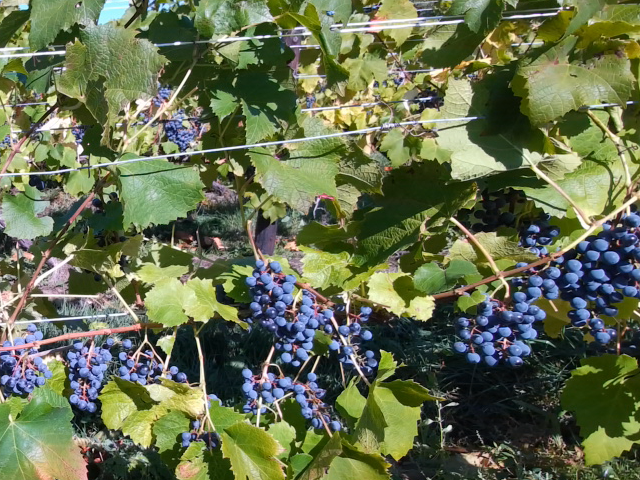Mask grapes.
Returning a JSON list of instances; mask_svg holds the SVG:
<instances>
[{"instance_id": "12", "label": "grapes", "mask_w": 640, "mask_h": 480, "mask_svg": "<svg viewBox=\"0 0 640 480\" xmlns=\"http://www.w3.org/2000/svg\"><path fill=\"white\" fill-rule=\"evenodd\" d=\"M27 330L30 333H34V334H27L24 337H16L14 339V344L16 346H21V345H26L28 343H36L37 341H40L43 338V332L42 331H37V326L35 324H29L27 326Z\"/></svg>"}, {"instance_id": "16", "label": "grapes", "mask_w": 640, "mask_h": 480, "mask_svg": "<svg viewBox=\"0 0 640 480\" xmlns=\"http://www.w3.org/2000/svg\"><path fill=\"white\" fill-rule=\"evenodd\" d=\"M360 311V315H359V321L363 324H366L368 322V320L370 319V315L373 313V307L371 305H362L359 308Z\"/></svg>"}, {"instance_id": "1", "label": "grapes", "mask_w": 640, "mask_h": 480, "mask_svg": "<svg viewBox=\"0 0 640 480\" xmlns=\"http://www.w3.org/2000/svg\"><path fill=\"white\" fill-rule=\"evenodd\" d=\"M640 223V213L632 211L622 216V226L613 227L606 223L599 231V237H590L578 245L580 253H586V261L570 259L565 267L547 266L544 269V277L532 274L527 280L524 292H516L513 295L516 311H502L493 313L498 307L496 301L488 293L481 295L483 307L482 314L476 316L479 326H486L480 334L471 332L470 320L459 317L456 320L458 333L461 337L471 340L478 346H483L485 362L490 365H498L500 358L513 368L524 363L522 356H528L531 348L523 341L514 339L508 348L497 351L495 342L499 343L502 337H512L514 330L520 331L524 340H535L538 331L534 322L543 321L546 311L538 304H532L542 294L547 299L570 300L574 309L567 312L572 326H590V335L596 342L610 343L616 336L617 330L607 327L602 317L590 318L591 310L587 308L588 300L597 305L600 312L608 317L619 314V307L611 305L622 303L626 297H639L640 289L629 285L630 281L640 280V268L627 257L640 260L639 234L630 232Z\"/></svg>"}, {"instance_id": "7", "label": "grapes", "mask_w": 640, "mask_h": 480, "mask_svg": "<svg viewBox=\"0 0 640 480\" xmlns=\"http://www.w3.org/2000/svg\"><path fill=\"white\" fill-rule=\"evenodd\" d=\"M128 353L127 352H120L119 353V359L121 361H126V366H120L118 368V374L121 376L122 379H126L128 381H133V382H137L139 381L142 385L146 384V378L147 375H153L154 374V370L155 369H159L160 371L164 370V367L162 366L161 363H158L156 360L151 361H146L145 363L139 362L137 364V369L138 372H131L129 374V371L131 370V368L134 367L135 362L132 359H128Z\"/></svg>"}, {"instance_id": "8", "label": "grapes", "mask_w": 640, "mask_h": 480, "mask_svg": "<svg viewBox=\"0 0 640 480\" xmlns=\"http://www.w3.org/2000/svg\"><path fill=\"white\" fill-rule=\"evenodd\" d=\"M242 376L245 377V381L242 382V392L247 396L246 401L243 403L244 413L258 414L257 406L251 405L254 400L259 398L258 387L259 383L254 382L252 379L253 372L251 368H244L242 370Z\"/></svg>"}, {"instance_id": "11", "label": "grapes", "mask_w": 640, "mask_h": 480, "mask_svg": "<svg viewBox=\"0 0 640 480\" xmlns=\"http://www.w3.org/2000/svg\"><path fill=\"white\" fill-rule=\"evenodd\" d=\"M453 347L455 348V351L457 353L465 354L466 361L468 363L480 364L482 362V357L478 353L469 352V350L471 349V345L469 343H466L464 340L456 341L453 344Z\"/></svg>"}, {"instance_id": "9", "label": "grapes", "mask_w": 640, "mask_h": 480, "mask_svg": "<svg viewBox=\"0 0 640 480\" xmlns=\"http://www.w3.org/2000/svg\"><path fill=\"white\" fill-rule=\"evenodd\" d=\"M329 348L332 352L339 349L340 354L337 356V361L341 363L344 369H350L353 365L352 359L349 357L353 353V348L348 345H343L339 338L333 339L329 343Z\"/></svg>"}, {"instance_id": "5", "label": "grapes", "mask_w": 640, "mask_h": 480, "mask_svg": "<svg viewBox=\"0 0 640 480\" xmlns=\"http://www.w3.org/2000/svg\"><path fill=\"white\" fill-rule=\"evenodd\" d=\"M267 376L273 384L268 382H264L262 384L261 396L265 400L266 403H273L278 401L279 398H283L287 395V392L293 391L294 399L300 404L301 414L306 420H312V425L316 429H320L324 426V423L319 419V414L314 411L316 406L314 404H309L308 399L305 396V386L302 383H294V380L291 377H283L282 379L277 378V376L268 372Z\"/></svg>"}, {"instance_id": "6", "label": "grapes", "mask_w": 640, "mask_h": 480, "mask_svg": "<svg viewBox=\"0 0 640 480\" xmlns=\"http://www.w3.org/2000/svg\"><path fill=\"white\" fill-rule=\"evenodd\" d=\"M559 234V226L553 224L543 232L538 224L530 225L526 234L519 240V245L523 248H529L534 256H543L547 254V247L552 243V237Z\"/></svg>"}, {"instance_id": "17", "label": "grapes", "mask_w": 640, "mask_h": 480, "mask_svg": "<svg viewBox=\"0 0 640 480\" xmlns=\"http://www.w3.org/2000/svg\"><path fill=\"white\" fill-rule=\"evenodd\" d=\"M325 424L329 426V429L334 432H338L341 429V423L339 421H333L328 414L322 416Z\"/></svg>"}, {"instance_id": "10", "label": "grapes", "mask_w": 640, "mask_h": 480, "mask_svg": "<svg viewBox=\"0 0 640 480\" xmlns=\"http://www.w3.org/2000/svg\"><path fill=\"white\" fill-rule=\"evenodd\" d=\"M339 333L342 336H349L353 333L355 335H359L362 340L372 341L374 339V334L370 329H361V326L358 323H351L348 325H341L339 327Z\"/></svg>"}, {"instance_id": "15", "label": "grapes", "mask_w": 640, "mask_h": 480, "mask_svg": "<svg viewBox=\"0 0 640 480\" xmlns=\"http://www.w3.org/2000/svg\"><path fill=\"white\" fill-rule=\"evenodd\" d=\"M177 374V379L180 383H184L188 379V375L186 372H179V368L177 366H170L169 370L166 372V378L171 379L172 376Z\"/></svg>"}, {"instance_id": "13", "label": "grapes", "mask_w": 640, "mask_h": 480, "mask_svg": "<svg viewBox=\"0 0 640 480\" xmlns=\"http://www.w3.org/2000/svg\"><path fill=\"white\" fill-rule=\"evenodd\" d=\"M365 356V365L361 368V371L365 375H372L374 373V369L378 367L379 360L375 357V352L373 350H366L364 352Z\"/></svg>"}, {"instance_id": "14", "label": "grapes", "mask_w": 640, "mask_h": 480, "mask_svg": "<svg viewBox=\"0 0 640 480\" xmlns=\"http://www.w3.org/2000/svg\"><path fill=\"white\" fill-rule=\"evenodd\" d=\"M316 380H317V375L315 373H309L307 387L313 393H315L318 398H324L327 394V389L324 387H319V384L315 382Z\"/></svg>"}, {"instance_id": "3", "label": "grapes", "mask_w": 640, "mask_h": 480, "mask_svg": "<svg viewBox=\"0 0 640 480\" xmlns=\"http://www.w3.org/2000/svg\"><path fill=\"white\" fill-rule=\"evenodd\" d=\"M73 350L66 352V361L70 363L69 369V388L74 391V394L70 397V402L75 404L82 412L95 413L97 411V405L94 402H86L80 400L82 395L81 385L76 382L78 377L88 378L91 381V386L87 389V394L91 401H95L99 394L97 389L101 386V381L104 379L103 371L108 368V364L105 361L112 359V353L108 349H101L95 347L94 352L96 357L90 358V363L93 364L91 369L86 368L88 362L86 360L88 354V347L79 340H73L71 343Z\"/></svg>"}, {"instance_id": "4", "label": "grapes", "mask_w": 640, "mask_h": 480, "mask_svg": "<svg viewBox=\"0 0 640 480\" xmlns=\"http://www.w3.org/2000/svg\"><path fill=\"white\" fill-rule=\"evenodd\" d=\"M12 350L2 351L0 353V370L5 371L10 369L13 373L2 374L0 376V383L5 386L4 395L11 396V392L15 395L31 394L35 389V385H44L45 378L51 379L52 372L47 368V364L43 363V358L35 356L32 359V364L36 366V370L43 373V376H37L33 369H25V378H21L20 364L14 356Z\"/></svg>"}, {"instance_id": "18", "label": "grapes", "mask_w": 640, "mask_h": 480, "mask_svg": "<svg viewBox=\"0 0 640 480\" xmlns=\"http://www.w3.org/2000/svg\"><path fill=\"white\" fill-rule=\"evenodd\" d=\"M197 435L196 434H192L191 432H185L182 434V446L186 447L189 445L190 441H192L193 439H196Z\"/></svg>"}, {"instance_id": "2", "label": "grapes", "mask_w": 640, "mask_h": 480, "mask_svg": "<svg viewBox=\"0 0 640 480\" xmlns=\"http://www.w3.org/2000/svg\"><path fill=\"white\" fill-rule=\"evenodd\" d=\"M256 268L252 276H248L245 284L250 289L253 301L250 310L262 328L274 332L277 341L274 346L282 351L281 361L299 367L302 361L309 359V352L314 348L315 329L320 325L327 334L333 331L329 320L334 316L331 309H324L315 314L310 308L317 297L308 291L302 296V303L297 313V322H288L285 318L287 306L293 302L294 282L297 277L293 273L285 276V282L273 280L270 273H262L267 265L263 259L255 261Z\"/></svg>"}]
</instances>
